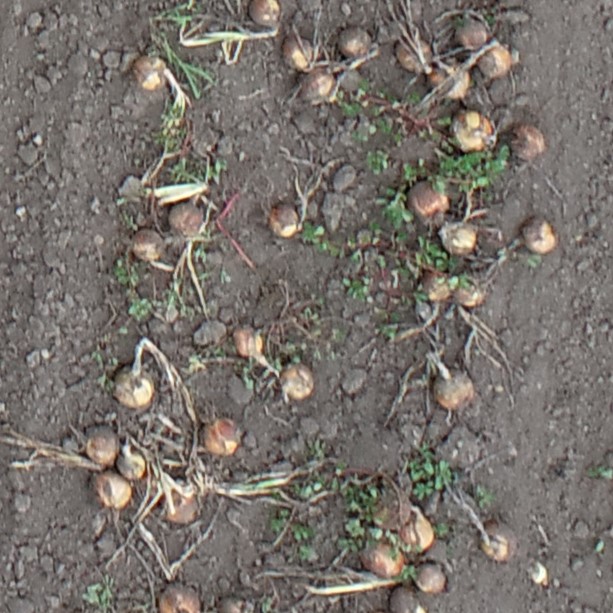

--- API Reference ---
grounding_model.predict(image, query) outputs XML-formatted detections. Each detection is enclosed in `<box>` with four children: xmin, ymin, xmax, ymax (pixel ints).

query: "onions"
<box><xmin>477</xmin><ymin>44</ymin><xmax>514</xmax><ymax>78</ymax></box>
<box><xmin>479</xmin><ymin>528</ymin><xmax>511</xmax><ymax>560</ymax></box>
<box><xmin>90</xmin><ymin>472</ymin><xmax>131</xmax><ymax>508</ymax></box>
<box><xmin>127</xmin><ymin>228</ymin><xmax>162</xmax><ymax>265</ymax></box>
<box><xmin>281</xmin><ymin>35</ymin><xmax>315</xmax><ymax>70</ymax></box>
<box><xmin>419</xmin><ymin>267</ymin><xmax>456</xmax><ymax>303</ymax></box>
<box><xmin>389</xmin><ymin>586</ymin><xmax>419</xmax><ymax>612</ymax></box>
<box><xmin>434</xmin><ymin>67</ymin><xmax>470</xmax><ymax>101</ymax></box>
<box><xmin>217</xmin><ymin>595</ymin><xmax>249</xmax><ymax>613</ymax></box>
<box><xmin>170</xmin><ymin>204</ymin><xmax>201</xmax><ymax>236</ymax></box>
<box><xmin>265</xmin><ymin>201</ymin><xmax>298</xmax><ymax>238</ymax></box>
<box><xmin>441</xmin><ymin>221</ymin><xmax>479</xmax><ymax>255</ymax></box>
<box><xmin>518</xmin><ymin>217</ymin><xmax>555</xmax><ymax>253</ymax></box>
<box><xmin>114</xmin><ymin>446</ymin><xmax>145</xmax><ymax>477</ymax></box>
<box><xmin>200</xmin><ymin>418</ymin><xmax>238</xmax><ymax>456</ymax></box>
<box><xmin>362</xmin><ymin>536</ymin><xmax>402</xmax><ymax>575</ymax></box>
<box><xmin>85</xmin><ymin>428</ymin><xmax>117</xmax><ymax>465</ymax></box>
<box><xmin>456</xmin><ymin>282</ymin><xmax>485</xmax><ymax>308</ymax></box>
<box><xmin>431</xmin><ymin>370</ymin><xmax>473</xmax><ymax>409</ymax></box>
<box><xmin>395</xmin><ymin>42</ymin><xmax>423</xmax><ymax>70</ymax></box>
<box><xmin>452</xmin><ymin>110</ymin><xmax>494</xmax><ymax>151</ymax></box>
<box><xmin>337</xmin><ymin>27</ymin><xmax>370</xmax><ymax>60</ymax></box>
<box><xmin>111</xmin><ymin>370</ymin><xmax>153</xmax><ymax>410</ymax></box>
<box><xmin>509</xmin><ymin>123</ymin><xmax>543</xmax><ymax>162</ymax></box>
<box><xmin>135</xmin><ymin>58</ymin><xmax>165</xmax><ymax>95</ymax></box>
<box><xmin>231</xmin><ymin>328</ymin><xmax>261</xmax><ymax>357</ymax></box>
<box><xmin>413</xmin><ymin>564</ymin><xmax>446</xmax><ymax>593</ymax></box>
<box><xmin>140</xmin><ymin>474</ymin><xmax>167</xmax><ymax>501</ymax></box>
<box><xmin>247</xmin><ymin>0</ymin><xmax>278</xmax><ymax>27</ymax></box>
<box><xmin>161</xmin><ymin>487</ymin><xmax>199</xmax><ymax>524</ymax></box>
<box><xmin>298</xmin><ymin>69</ymin><xmax>335</xmax><ymax>105</ymax></box>
<box><xmin>280</xmin><ymin>362</ymin><xmax>314</xmax><ymax>401</ymax></box>
<box><xmin>452</xmin><ymin>15</ymin><xmax>486</xmax><ymax>49</ymax></box>
<box><xmin>156</xmin><ymin>581</ymin><xmax>201</xmax><ymax>612</ymax></box>
<box><xmin>398</xmin><ymin>513</ymin><xmax>436</xmax><ymax>550</ymax></box>
<box><xmin>406</xmin><ymin>183</ymin><xmax>449</xmax><ymax>224</ymax></box>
